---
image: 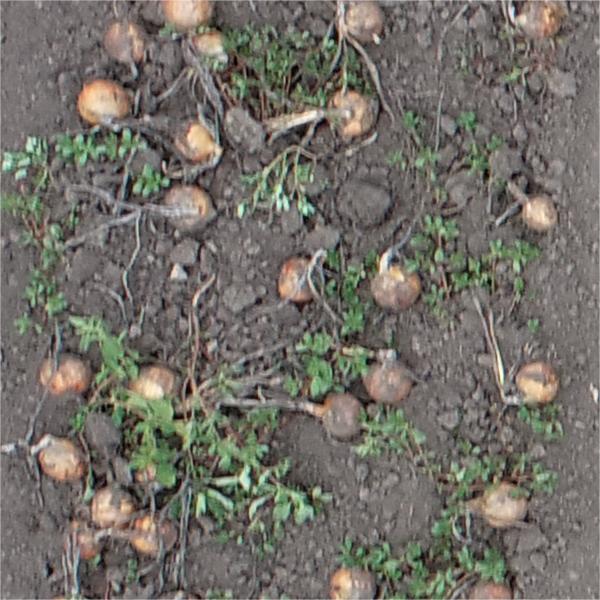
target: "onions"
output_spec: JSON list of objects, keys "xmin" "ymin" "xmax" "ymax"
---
[
  {"xmin": 35, "ymin": 436, "xmax": 83, "ymax": 481},
  {"xmin": 329, "ymin": 565, "xmax": 376, "ymax": 599},
  {"xmin": 329, "ymin": 88, "xmax": 373, "ymax": 136},
  {"xmin": 101, "ymin": 21, "xmax": 145, "ymax": 64},
  {"xmin": 139, "ymin": 512, "xmax": 169, "ymax": 549},
  {"xmin": 154, "ymin": 182, "xmax": 211, "ymax": 224},
  {"xmin": 136, "ymin": 459, "xmax": 166, "ymax": 487},
  {"xmin": 320, "ymin": 394, "xmax": 362, "ymax": 442},
  {"xmin": 130, "ymin": 363, "xmax": 175, "ymax": 402},
  {"xmin": 175, "ymin": 120, "xmax": 216, "ymax": 162},
  {"xmin": 191, "ymin": 29, "xmax": 228, "ymax": 66},
  {"xmin": 161, "ymin": 0, "xmax": 207, "ymax": 34},
  {"xmin": 73, "ymin": 527, "xmax": 98, "ymax": 559},
  {"xmin": 482, "ymin": 479, "xmax": 526, "ymax": 524},
  {"xmin": 512, "ymin": 359, "xmax": 557, "ymax": 404},
  {"xmin": 510, "ymin": 0, "xmax": 563, "ymax": 37},
  {"xmin": 41, "ymin": 355, "xmax": 90, "ymax": 395},
  {"xmin": 520, "ymin": 195, "xmax": 555, "ymax": 232},
  {"xmin": 363, "ymin": 357, "xmax": 413, "ymax": 402},
  {"xmin": 338, "ymin": 3, "xmax": 385, "ymax": 41},
  {"xmin": 276, "ymin": 256, "xmax": 318, "ymax": 301},
  {"xmin": 78, "ymin": 79, "xmax": 127, "ymax": 124},
  {"xmin": 466, "ymin": 577, "xmax": 511, "ymax": 599},
  {"xmin": 372, "ymin": 257, "xmax": 418, "ymax": 309},
  {"xmin": 90, "ymin": 485, "xmax": 133, "ymax": 527}
]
